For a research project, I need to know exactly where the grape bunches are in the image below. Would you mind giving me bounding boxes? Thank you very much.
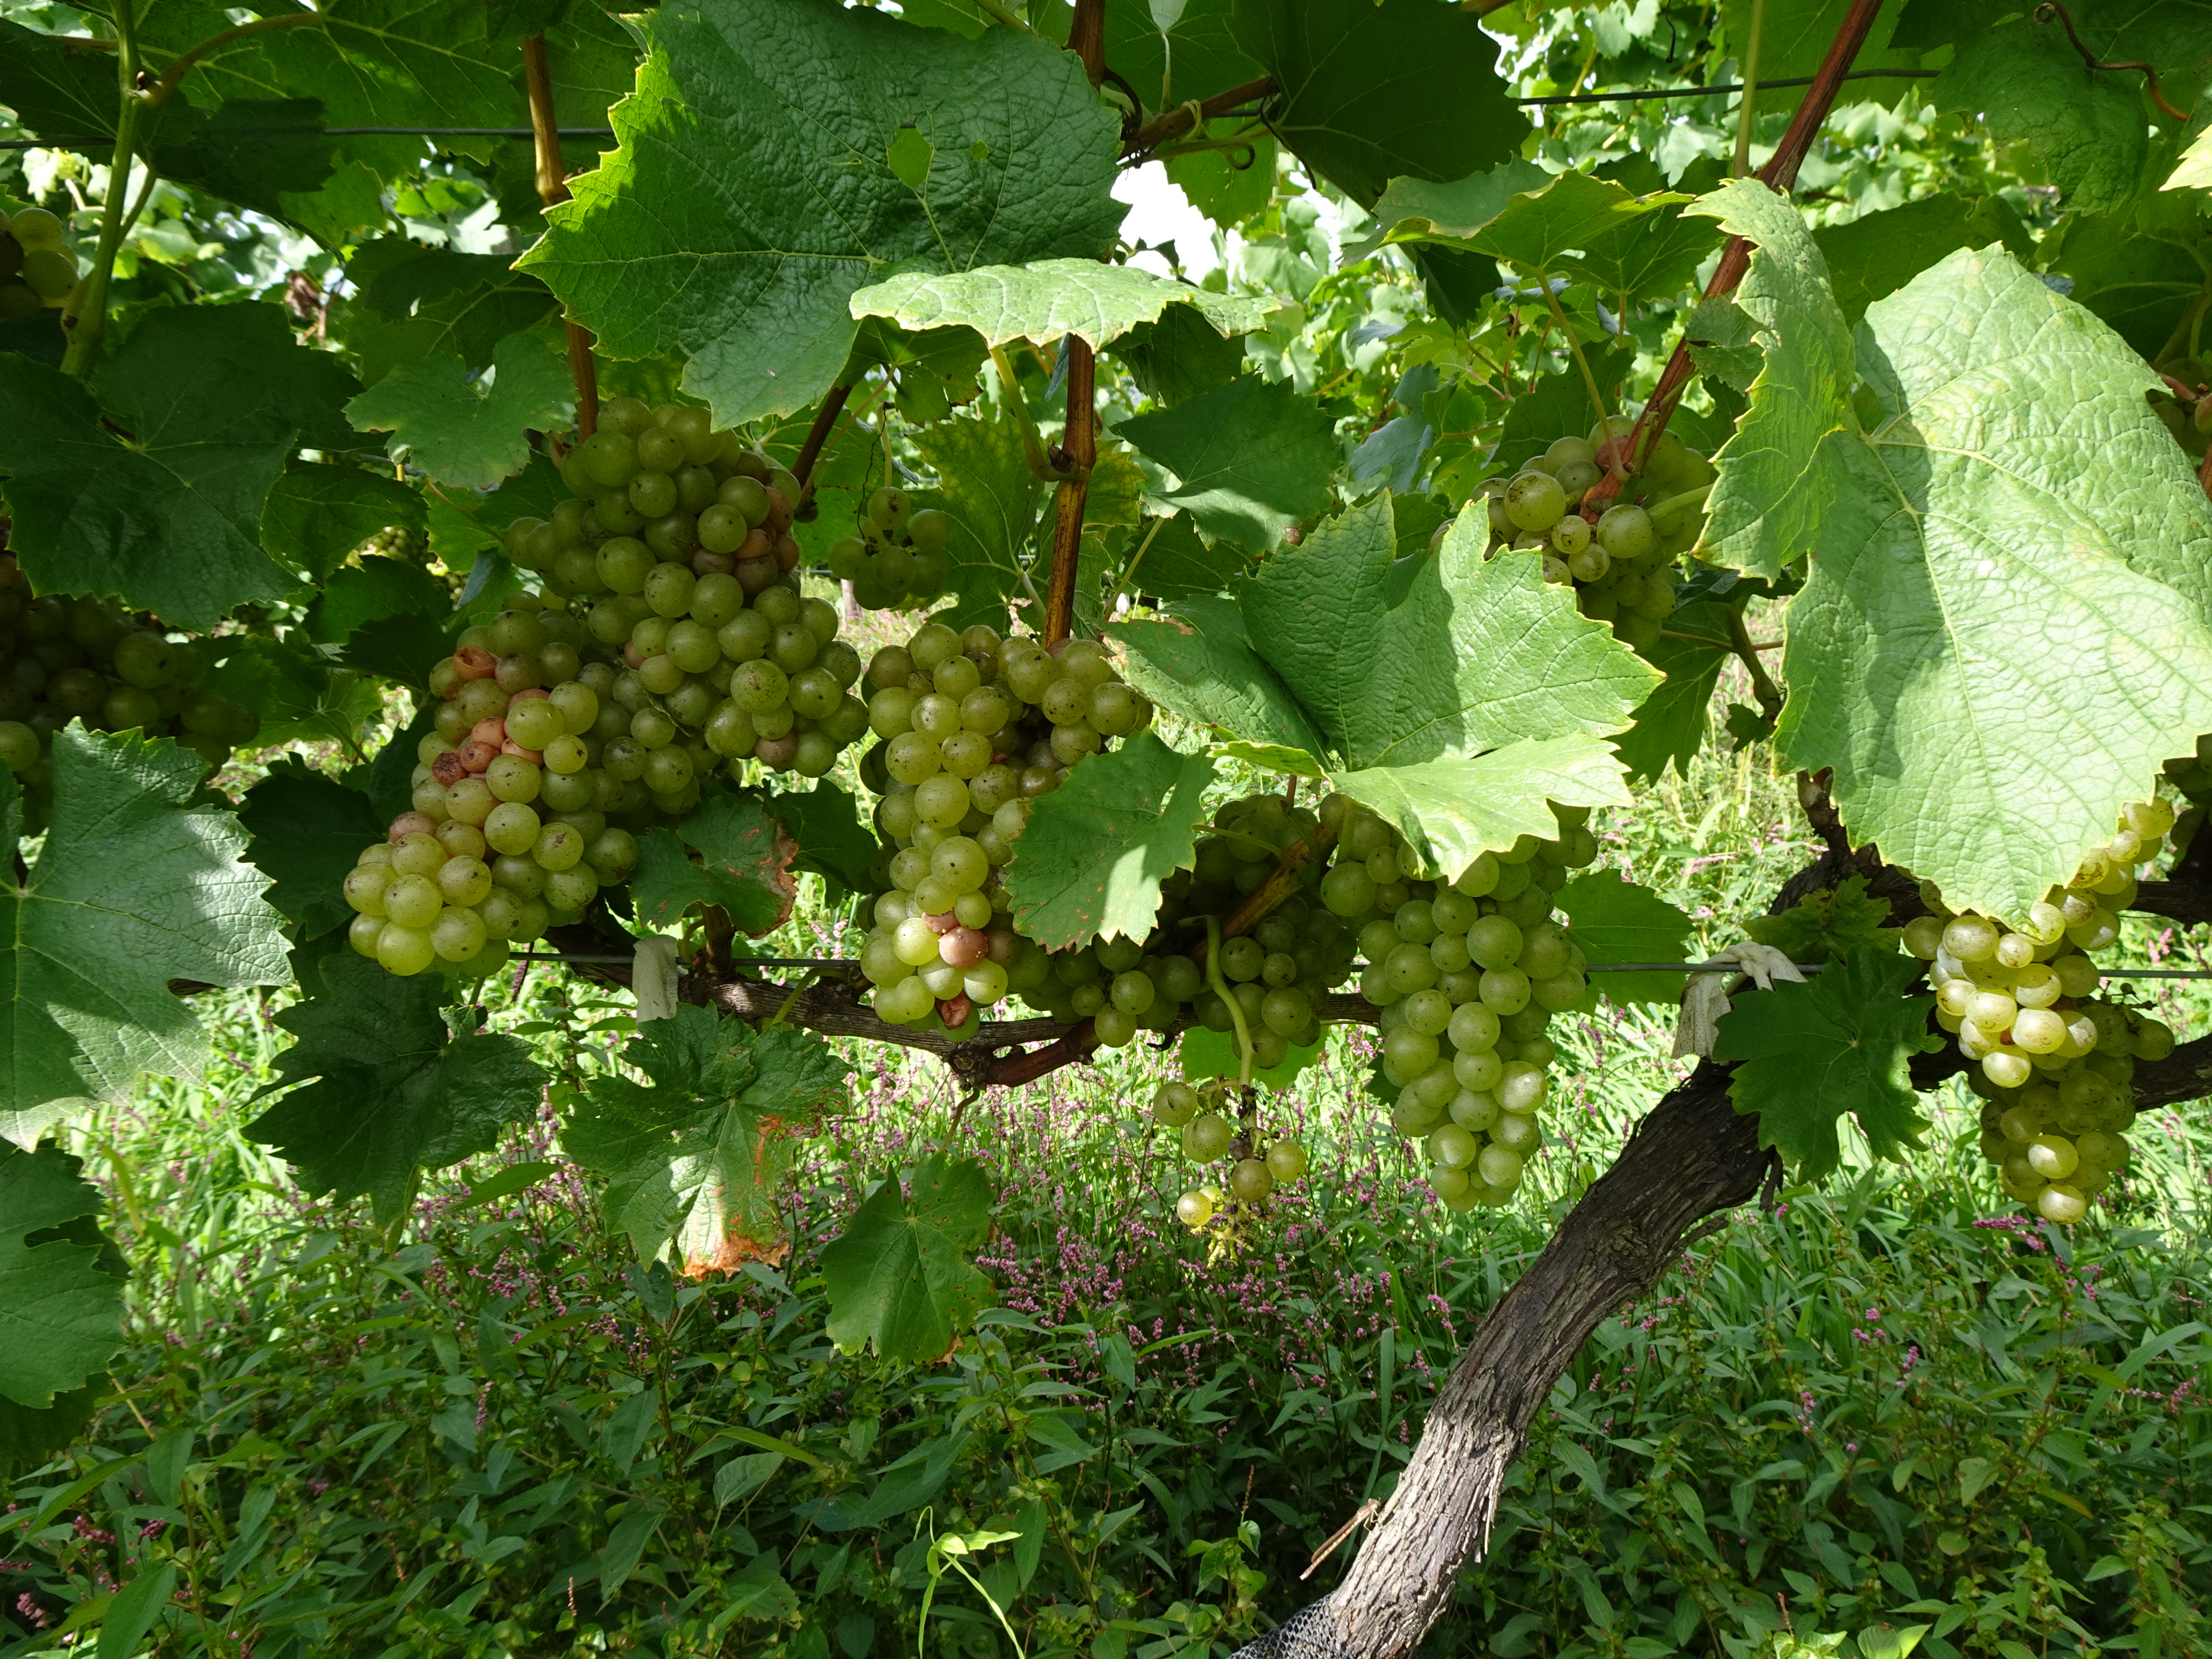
[1917,998,2176,1224]
[1318,793,1597,1214]
[342,583,744,976]
[861,621,1154,1024]
[1021,867,1201,1047]
[509,396,869,777]
[1154,1081,1305,1227]
[1902,796,2173,1087]
[828,486,949,610]
[1190,793,1357,1070]
[1470,415,1711,652]
[0,526,261,786]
